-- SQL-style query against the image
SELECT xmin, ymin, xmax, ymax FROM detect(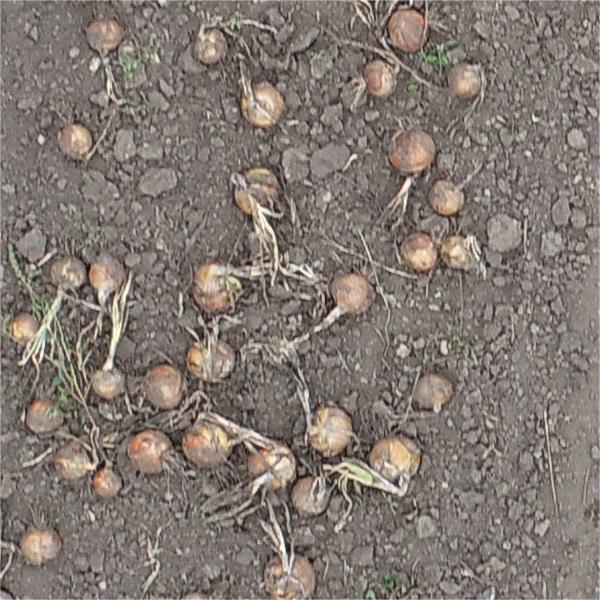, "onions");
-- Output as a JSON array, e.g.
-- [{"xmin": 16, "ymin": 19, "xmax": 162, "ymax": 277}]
[
  {"xmin": 398, "ymin": 231, "xmax": 435, "ymax": 271},
  {"xmin": 191, "ymin": 261, "xmax": 242, "ymax": 311},
  {"xmin": 7, "ymin": 312, "xmax": 38, "ymax": 341},
  {"xmin": 141, "ymin": 364, "xmax": 182, "ymax": 406},
  {"xmin": 384, "ymin": 7, "xmax": 426, "ymax": 51},
  {"xmin": 83, "ymin": 19, "xmax": 121, "ymax": 51},
  {"xmin": 439, "ymin": 233, "xmax": 473, "ymax": 268},
  {"xmin": 193, "ymin": 29, "xmax": 225, "ymax": 61},
  {"xmin": 187, "ymin": 340, "xmax": 235, "ymax": 381},
  {"xmin": 127, "ymin": 427, "xmax": 170, "ymax": 471},
  {"xmin": 90, "ymin": 366, "xmax": 123, "ymax": 397},
  {"xmin": 53, "ymin": 438, "xmax": 89, "ymax": 479},
  {"xmin": 361, "ymin": 58, "xmax": 395, "ymax": 94},
  {"xmin": 385, "ymin": 129, "xmax": 434, "ymax": 174},
  {"xmin": 183, "ymin": 419, "xmax": 232, "ymax": 467},
  {"xmin": 291, "ymin": 475, "xmax": 329, "ymax": 513},
  {"xmin": 237, "ymin": 166, "xmax": 279, "ymax": 214},
  {"xmin": 19, "ymin": 524, "xmax": 60, "ymax": 563},
  {"xmin": 306, "ymin": 405, "xmax": 350, "ymax": 452},
  {"xmin": 245, "ymin": 446, "xmax": 293, "ymax": 487},
  {"xmin": 45, "ymin": 254, "xmax": 83, "ymax": 289},
  {"xmin": 89, "ymin": 464, "xmax": 121, "ymax": 496},
  {"xmin": 24, "ymin": 396, "xmax": 61, "ymax": 433},
  {"xmin": 414, "ymin": 371, "xmax": 451, "ymax": 410},
  {"xmin": 329, "ymin": 271, "xmax": 372, "ymax": 313},
  {"xmin": 368, "ymin": 435, "xmax": 419, "ymax": 481},
  {"xmin": 87, "ymin": 262, "xmax": 120, "ymax": 291},
  {"xmin": 239, "ymin": 82, "xmax": 282, "ymax": 125},
  {"xmin": 56, "ymin": 121, "xmax": 91, "ymax": 157},
  {"xmin": 427, "ymin": 179, "xmax": 461, "ymax": 214},
  {"xmin": 450, "ymin": 65, "xmax": 481, "ymax": 96},
  {"xmin": 264, "ymin": 556, "xmax": 313, "ymax": 596}
]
